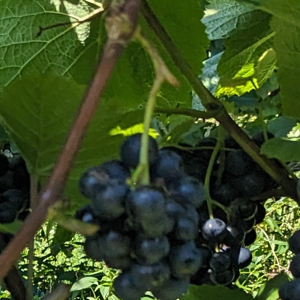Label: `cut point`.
Masks as SVG:
<instances>
[{
  "label": "cut point",
  "instance_id": "cut-point-1",
  "mask_svg": "<svg viewBox=\"0 0 300 300\" xmlns=\"http://www.w3.org/2000/svg\"><path fill=\"white\" fill-rule=\"evenodd\" d=\"M143 45L148 53L150 54L152 61L154 63L155 69V79L151 86L148 102L146 104L143 123H142V132L147 134L149 132L150 121L153 114V108L155 105L156 96L159 92V89L162 83L166 80L167 82L171 83L174 87H178L180 85L179 80L173 76L170 71L167 69L163 58L157 52L154 44L147 38V36L141 32V26L137 25L136 30L132 34L131 38L128 40V44L132 45L135 42Z\"/></svg>",
  "mask_w": 300,
  "mask_h": 300
},
{
  "label": "cut point",
  "instance_id": "cut-point-2",
  "mask_svg": "<svg viewBox=\"0 0 300 300\" xmlns=\"http://www.w3.org/2000/svg\"><path fill=\"white\" fill-rule=\"evenodd\" d=\"M217 128H218L217 139L214 144V149H213L212 155L209 159V162L207 164L206 172H205V178H204V189L205 190L209 189L211 170H212L213 164L216 160V156L218 155L219 147H220V158L221 159L225 158V143H226V137L224 134L225 128L222 123H218Z\"/></svg>",
  "mask_w": 300,
  "mask_h": 300
}]
</instances>
